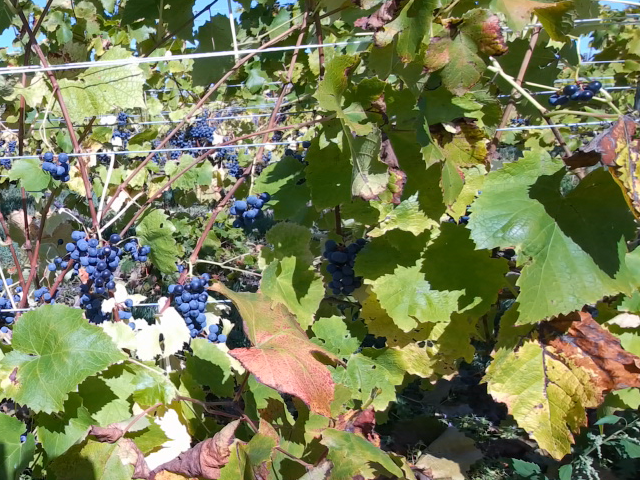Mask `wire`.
Segmentation results:
<instances>
[{
    "instance_id": "4f2155b8",
    "label": "wire",
    "mask_w": 640,
    "mask_h": 480,
    "mask_svg": "<svg viewBox=\"0 0 640 480\" xmlns=\"http://www.w3.org/2000/svg\"><path fill=\"white\" fill-rule=\"evenodd\" d=\"M640 13H627L625 16H600L595 18L576 17L574 28H585L591 26H615L623 24H640Z\"/></svg>"
},
{
    "instance_id": "a73af890",
    "label": "wire",
    "mask_w": 640,
    "mask_h": 480,
    "mask_svg": "<svg viewBox=\"0 0 640 480\" xmlns=\"http://www.w3.org/2000/svg\"><path fill=\"white\" fill-rule=\"evenodd\" d=\"M303 140H277V141H265L256 144H224V145H198L188 147H142L132 149H121L110 152H69V157H112L123 154H134L144 152H158L167 154L168 152H190L200 150H226V149H258L266 146H279V145H302Z\"/></svg>"
},
{
    "instance_id": "34cfc8c6",
    "label": "wire",
    "mask_w": 640,
    "mask_h": 480,
    "mask_svg": "<svg viewBox=\"0 0 640 480\" xmlns=\"http://www.w3.org/2000/svg\"><path fill=\"white\" fill-rule=\"evenodd\" d=\"M273 112L267 113H243L237 115H228V116H200L193 117L190 119L191 123L202 122V121H230V120H239L245 118H270L273 117Z\"/></svg>"
},
{
    "instance_id": "f0478fcc",
    "label": "wire",
    "mask_w": 640,
    "mask_h": 480,
    "mask_svg": "<svg viewBox=\"0 0 640 480\" xmlns=\"http://www.w3.org/2000/svg\"><path fill=\"white\" fill-rule=\"evenodd\" d=\"M615 123L614 119H610L607 121H594V122H565V123H556V124H546V125H527V124H517V125H508L504 127H497V132H506L510 130H548V129H558V128H567V127H607Z\"/></svg>"
},
{
    "instance_id": "d2f4af69",
    "label": "wire",
    "mask_w": 640,
    "mask_h": 480,
    "mask_svg": "<svg viewBox=\"0 0 640 480\" xmlns=\"http://www.w3.org/2000/svg\"><path fill=\"white\" fill-rule=\"evenodd\" d=\"M372 38H363L352 41H331L322 44H291L281 45L275 47L261 48V49H247V50H235V51H207L198 53H184V54H168L161 56H145L138 58H121L105 61H83L67 64H43L37 66H5L0 67V75H12L21 73H42V72H57L72 69L81 68H115L119 64L123 63H140L147 61H163L170 59H186V58H200V57H218V56H237V55H258L263 53L278 52L284 50L293 49H324L333 46H354L365 43H372Z\"/></svg>"
},
{
    "instance_id": "a009ed1b",
    "label": "wire",
    "mask_w": 640,
    "mask_h": 480,
    "mask_svg": "<svg viewBox=\"0 0 640 480\" xmlns=\"http://www.w3.org/2000/svg\"><path fill=\"white\" fill-rule=\"evenodd\" d=\"M181 118H173L159 121H141V122H97L93 123V128L99 127H143V126H161L181 123Z\"/></svg>"
}]
</instances>
